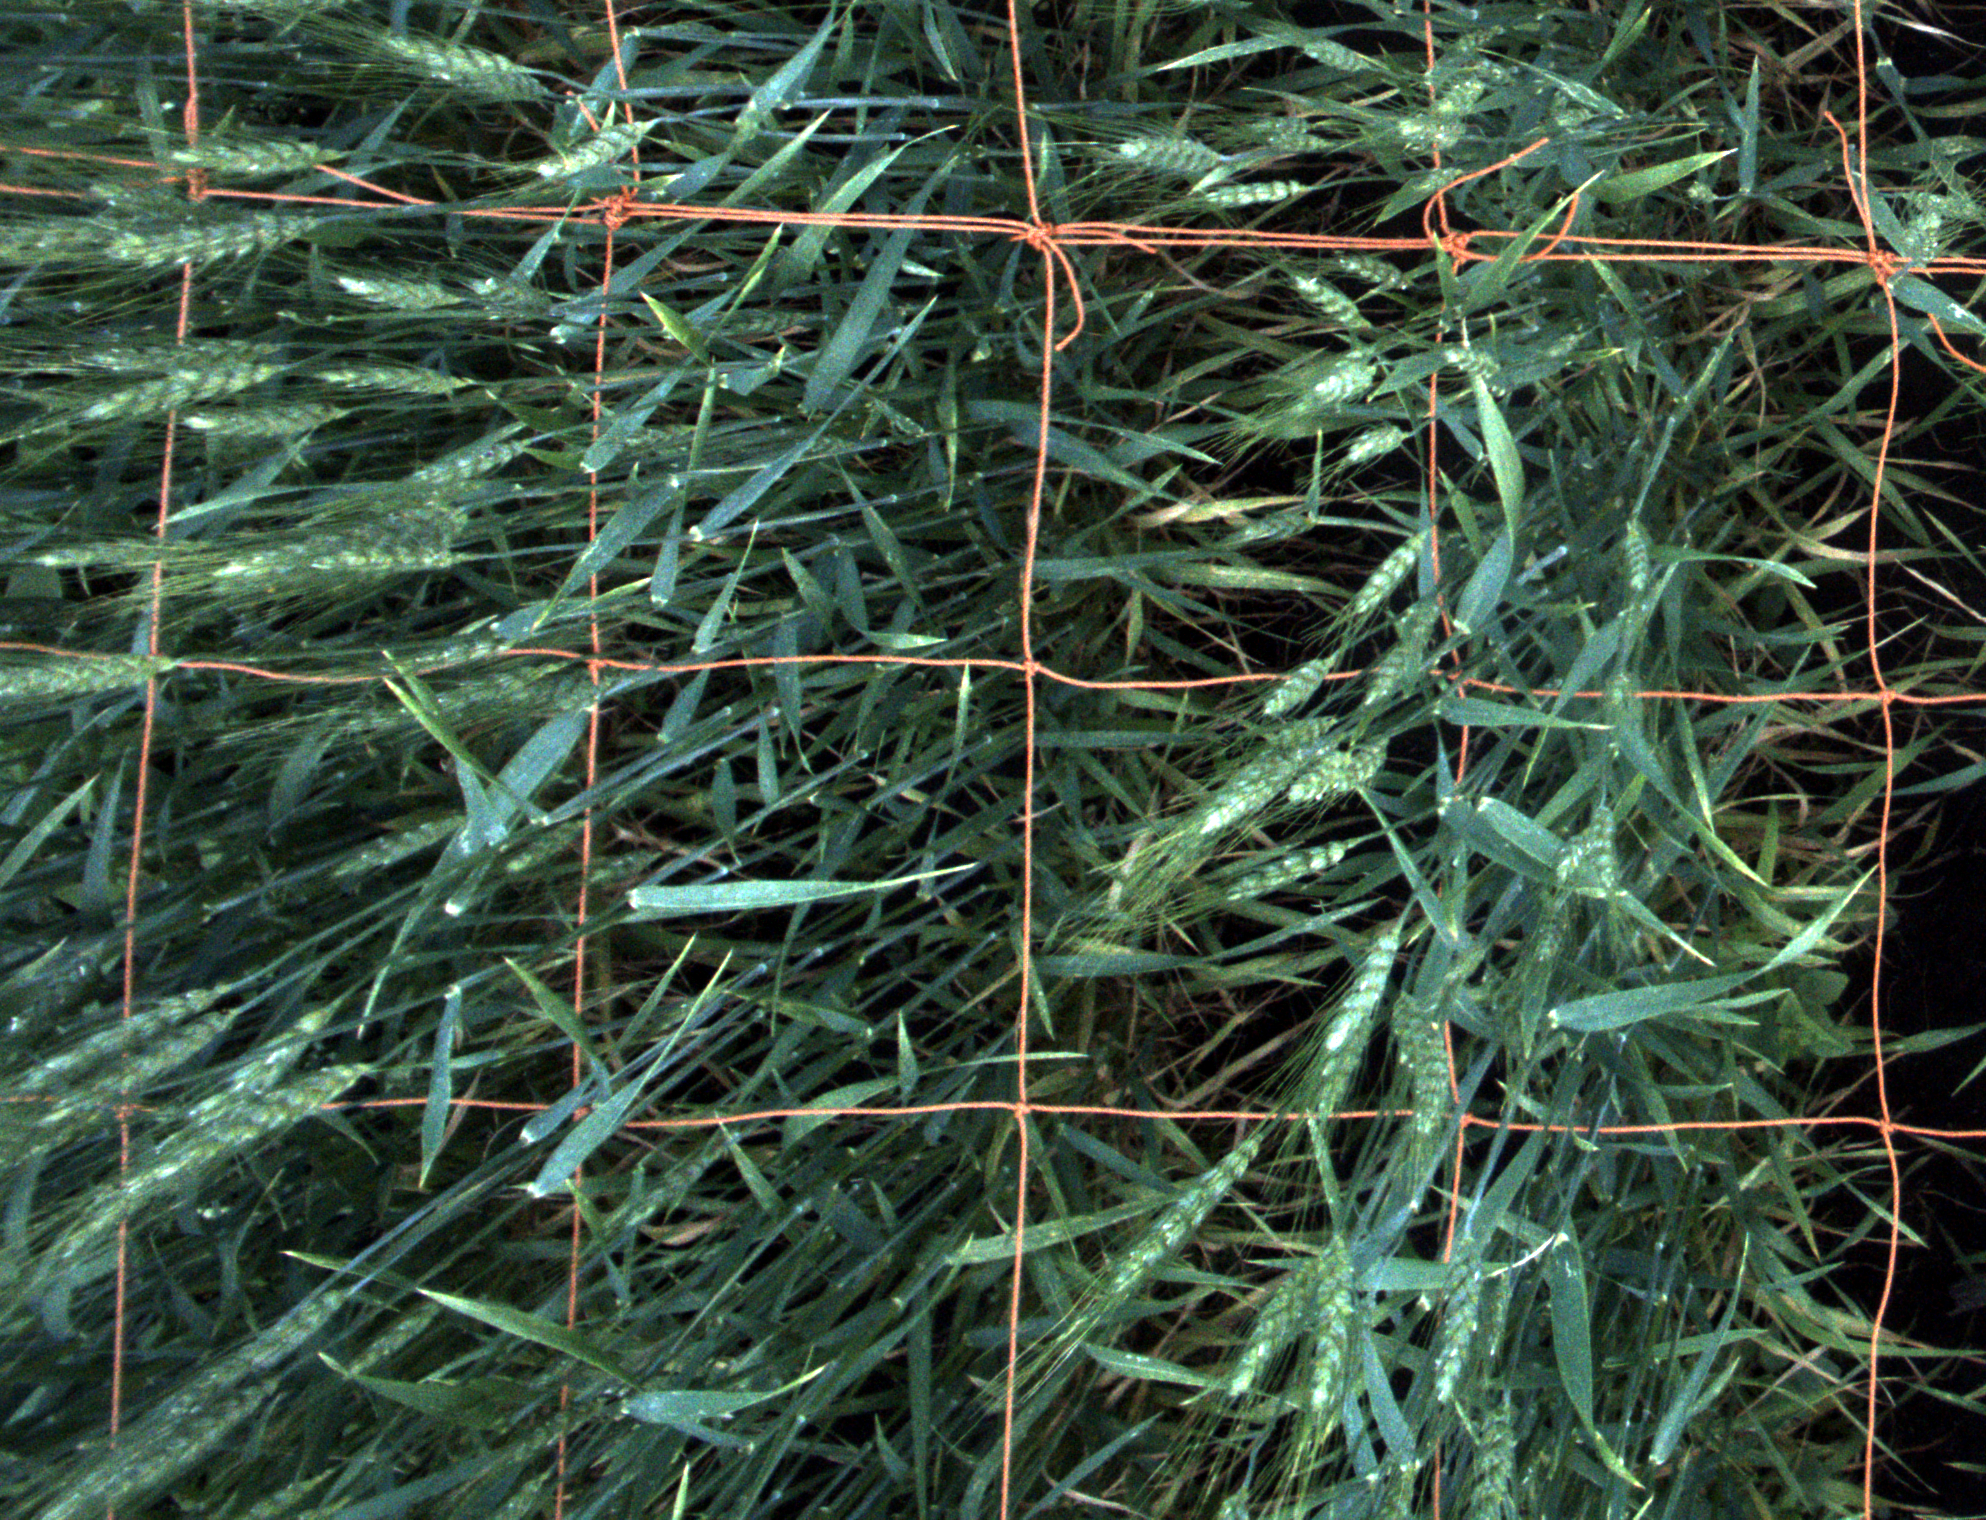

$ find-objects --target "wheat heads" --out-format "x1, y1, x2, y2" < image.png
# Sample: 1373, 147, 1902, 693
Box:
308, 554, 468, 572
50, 1279, 339, 1515
30, 532, 196, 572
337, 269, 468, 316
1918, 188, 1986, 223
372, 27, 560, 102
79, 364, 277, 426
1291, 737, 1390, 808
1415, 163, 1461, 194
1309, 1234, 1357, 1413
498, 1457, 554, 1520
0, 654, 180, 713
1119, 132, 1220, 175
1397, 115, 1472, 150
161, 135, 320, 177
1201, 735, 1327, 832
1229, 1254, 1313, 1400
1454, 29, 1499, 60
1472, 57, 1521, 88
0, 216, 125, 269
213, 393, 355, 440
1337, 258, 1406, 291
1324, 930, 1399, 1055
1442, 946, 1485, 983
1311, 358, 1379, 404
538, 117, 662, 179
244, 1473, 322, 1515
1622, 519, 1653, 592
114, 1376, 277, 1501
37, 1009, 238, 1131
1267, 654, 1333, 716
390, 439, 531, 495
1296, 276, 1375, 331
1432, 1239, 1479, 1404
512, 673, 627, 715
1344, 420, 1408, 459
1888, 208, 1943, 263
54, 336, 289, 378
1238, 112, 1313, 137
1278, 711, 1340, 740
406, 640, 518, 682
1198, 175, 1311, 207
207, 499, 474, 601
1265, 137, 1342, 154
501, 1395, 609, 1468
88, 183, 185, 214
1835, 0, 1876, 26
105, 212, 322, 272
350, 1290, 443, 1378
1302, 37, 1380, 80
584, 844, 664, 888
730, 311, 810, 333
624, 1146, 728, 1226
1437, 345, 1503, 382
1221, 841, 1349, 903
611, 422, 701, 453
304, 367, 481, 397
1357, 523, 1433, 612
478, 274, 558, 322
1364, 640, 1426, 706
1106, 1133, 1262, 1296
1536, 896, 1576, 963
1419, 1020, 1454, 1137
1483, 961, 1523, 1047
505, 815, 584, 872
330, 806, 468, 881
189, 1000, 341, 1128
1232, 512, 1311, 545
1395, 596, 1446, 636
1609, 665, 1631, 715
180, 0, 375, 26
1552, 112, 1602, 141
1433, 77, 1488, 115
1554, 828, 1591, 881
59, 1062, 373, 1259
4, 978, 238, 1113
1391, 989, 1422, 1058
1220, 1484, 1249, 1517
1541, 329, 1584, 366
1464, 1404, 1521, 1520
341, 663, 562, 733
1592, 801, 1620, 890
1485, 1267, 1514, 1356
1375, 1446, 1421, 1519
